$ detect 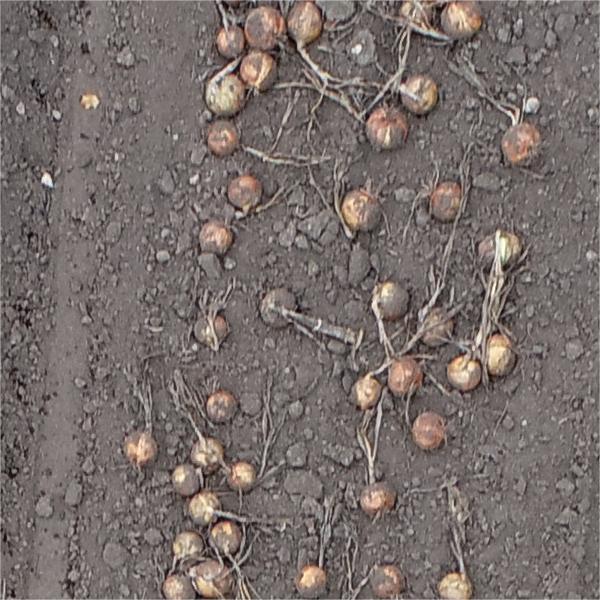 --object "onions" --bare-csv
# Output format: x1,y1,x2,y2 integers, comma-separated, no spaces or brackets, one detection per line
261,290,294,326
366,106,409,149
212,27,244,55
437,569,471,599
294,561,326,592
425,180,462,220
438,2,481,34
499,123,541,164
236,51,275,87
191,436,221,468
348,374,382,408
359,480,396,514
418,304,453,341
187,491,218,523
225,173,260,207
398,72,436,113
444,353,481,389
204,390,236,421
284,4,322,41
226,459,256,488
120,428,156,464
205,71,245,113
337,192,378,231
169,463,199,493
386,356,421,392
410,411,446,449
206,119,238,154
369,564,407,594
199,220,232,254
207,517,241,551
398,1,434,26
370,281,408,318
191,558,231,594
161,570,193,599
194,315,226,345
243,6,284,47
483,229,520,266
173,529,204,558
481,333,515,374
